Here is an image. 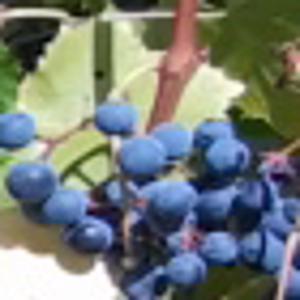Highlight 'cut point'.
I'll use <instances>...</instances> for the list:
<instances>
[{"label":"cut point","mask_w":300,"mask_h":300,"mask_svg":"<svg viewBox=\"0 0 300 300\" xmlns=\"http://www.w3.org/2000/svg\"><path fill=\"white\" fill-rule=\"evenodd\" d=\"M165 64L166 59L163 56H157L141 63L139 66L132 69L119 85H116L111 89L110 96L113 99H119L134 86L138 79L142 78L153 70L162 68Z\"/></svg>","instance_id":"obj_1"}]
</instances>
